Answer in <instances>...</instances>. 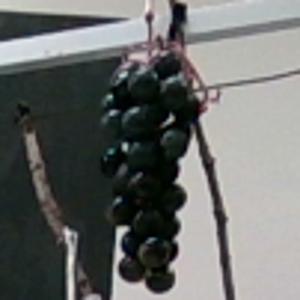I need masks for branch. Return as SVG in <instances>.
<instances>
[{
    "mask_svg": "<svg viewBox=\"0 0 300 300\" xmlns=\"http://www.w3.org/2000/svg\"><path fill=\"white\" fill-rule=\"evenodd\" d=\"M170 11V22L166 31V49H174L182 57L184 76L186 74L185 38L188 32V3L181 0H166Z\"/></svg>",
    "mask_w": 300,
    "mask_h": 300,
    "instance_id": "obj_3",
    "label": "branch"
},
{
    "mask_svg": "<svg viewBox=\"0 0 300 300\" xmlns=\"http://www.w3.org/2000/svg\"><path fill=\"white\" fill-rule=\"evenodd\" d=\"M195 142L198 146L199 165L202 167L207 182V191L210 194L212 207V219L216 232V243L218 248V261L222 277V287L225 300H237L235 282L230 250V239L227 231L229 216L224 207V199L221 194L218 181L216 163L218 159L212 156L210 143L206 138L202 125V117L191 123Z\"/></svg>",
    "mask_w": 300,
    "mask_h": 300,
    "instance_id": "obj_2",
    "label": "branch"
},
{
    "mask_svg": "<svg viewBox=\"0 0 300 300\" xmlns=\"http://www.w3.org/2000/svg\"><path fill=\"white\" fill-rule=\"evenodd\" d=\"M15 108L18 111L20 124L23 132L25 150L27 153L32 185L37 196L42 215L53 233L54 238L65 252L71 267L75 287L82 300H103L102 294H95L80 260L70 242L67 227L61 216L53 194L48 184L47 170L41 157L39 136L35 120L34 110L31 104L15 97Z\"/></svg>",
    "mask_w": 300,
    "mask_h": 300,
    "instance_id": "obj_1",
    "label": "branch"
}]
</instances>
